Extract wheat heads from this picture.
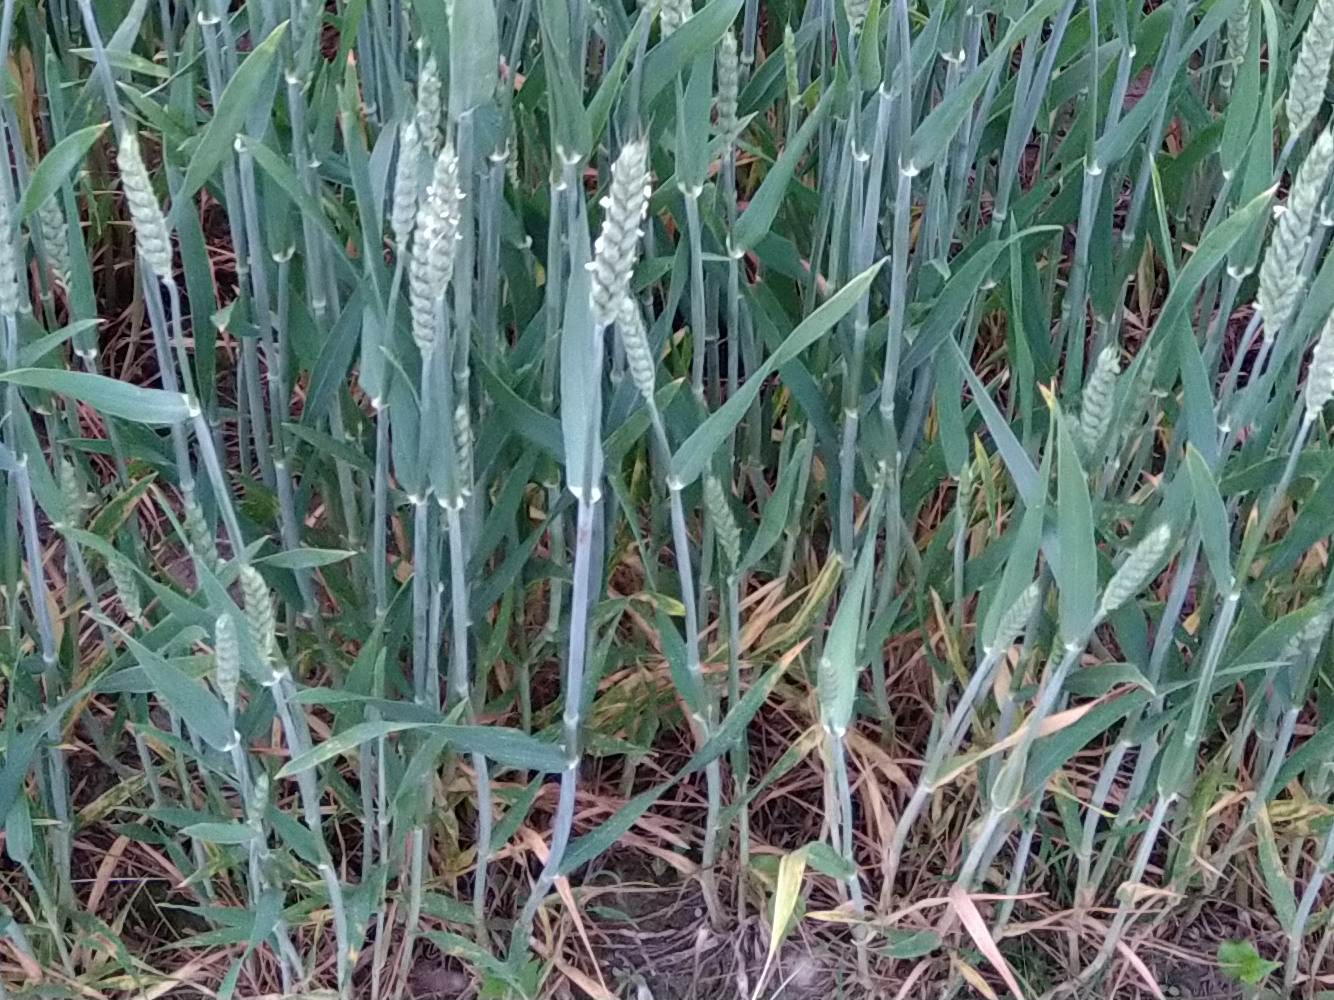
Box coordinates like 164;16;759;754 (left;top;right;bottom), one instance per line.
1263;275;1299;333
1103;527;1173;614
291;0;331;70
0;160;18;314
1290;0;1334;140
454;405;472;494
416;40;444;153
663;0;693;37
60;460;83;573
1227;0;1251;72
240;567;276;661
401;204;437;351
1308;304;1334;411
618;298;654;395
392;125;421;243
117;135;171;273
108;554;142;619
1289;125;1334;204
182;484;218;570
959;464;974;522
216;615;238;699
1082;349;1119;450
847;0;882;34
37;191;72;287
592;141;653;321
1124;345;1161;432
431;144;462;298
718;31;738;147
994;584;1040;649
785;25;799;102
1256;182;1314;312
705;477;741;565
